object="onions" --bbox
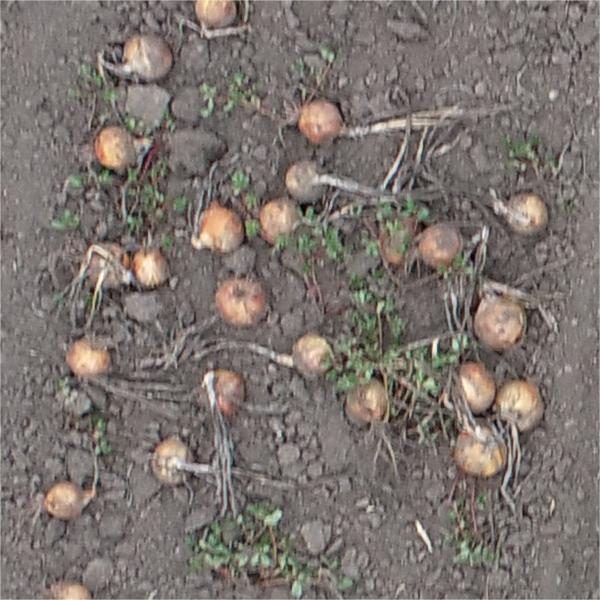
[377,231,416,265]
[416,222,459,266]
[473,298,525,348]
[129,248,167,286]
[122,33,171,79]
[193,0,244,32]
[293,333,333,378]
[297,99,340,141]
[216,276,266,325]
[90,126,136,170]
[498,190,545,234]
[150,437,188,483]
[496,380,542,428]
[341,379,386,423]
[193,205,244,250]
[66,339,110,378]
[41,480,80,519]
[200,369,242,417]
[53,579,90,599]
[79,244,123,288]
[257,198,299,242]
[456,362,495,409]
[454,425,504,475]
[284,159,324,201]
